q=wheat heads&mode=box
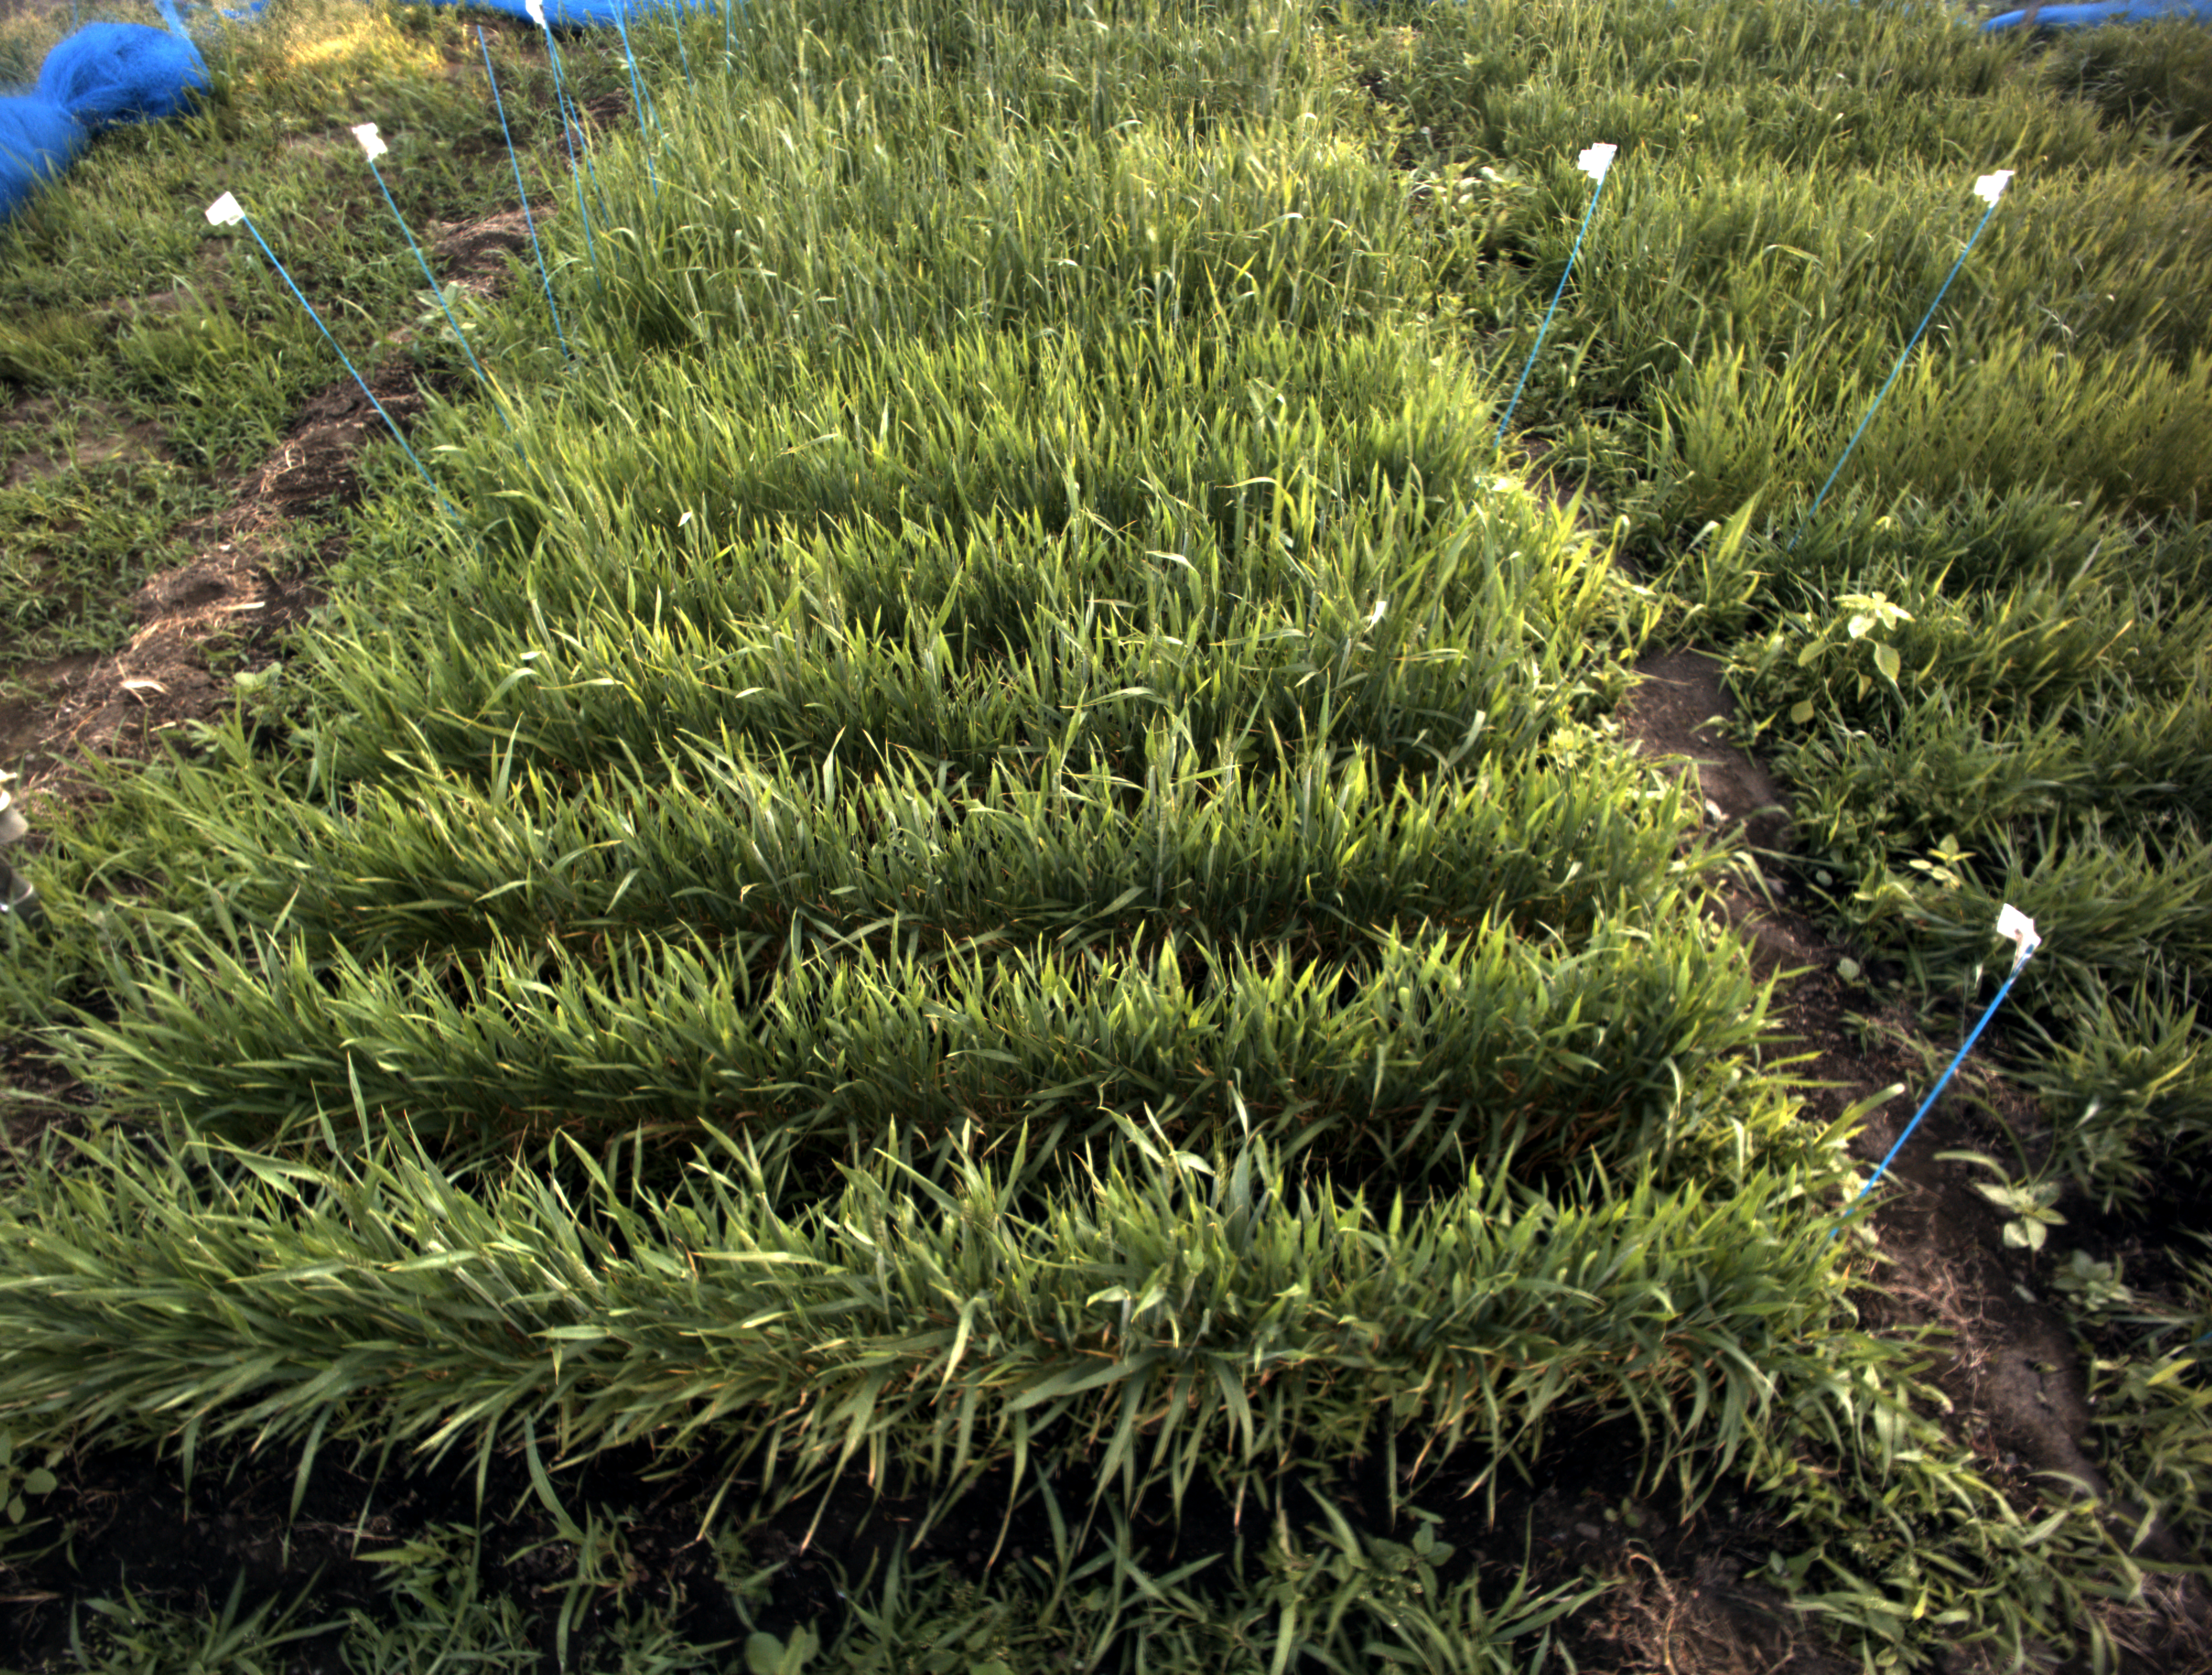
[1483,494,1490,508]
[1407,608,1423,642]
[1385,422,1390,440]
[1131,385,1137,409]
[818,585,831,620]
[772,102,780,123]
[1649,175,1658,196]
[1313,52,1322,84]
[1394,498,1408,541]
[591,509,601,537]
[745,836,757,858]
[756,798,771,836]
[798,625,805,667]
[1249,389,1262,417]
[1357,579,1371,611]
[1157,742,1167,770]
[186,1239,219,1267]
[766,104,774,124]
[1102,167,1112,190]
[801,804,812,829]
[697,139,708,167]
[1378,609,1396,651]
[1051,771,1063,825]
[594,487,610,532]
[1023,222,1033,247]
[333,1247,373,1273]
[1186,513,1195,554]
[739,753,758,797]
[869,1199,887,1248]
[922,433,932,472]
[736,173,746,214]
[1836,84,1846,112]
[872,109,878,136]
[764,124,774,167]
[1066,428,1073,462]
[766,230,778,264]
[1310,750,1322,790]
[614,136,637,189]
[767,658,783,687]
[977,232,986,256]
[1149,262,1158,284]
[771,123,781,153]
[675,104,687,131]
[630,645,641,677]
[1303,145,1309,168]
[1220,729,1233,781]
[637,197,652,238]
[1485,211,1496,233]
[1187,124,1194,147]
[1347,286,1355,308]
[1344,506,1354,548]
[1157,788,1168,833]
[691,130,699,152]
[1501,619,1518,654]
[828,266,838,297]
[822,140,830,161]
[975,1202,985,1221]
[751,250,762,273]
[1093,138,1107,169]
[1230,549,1240,585]
[416,748,453,801]
[1175,783,1185,813]
[1208,197,1216,223]
[1148,605,1156,640]
[596,151,607,189]
[1166,1229,1177,1264]
[1083,643,1094,675]
[802,97,813,134]
[1072,657,1083,695]
[1477,611,1495,657]
[1214,1150,1228,1203]
[837,97,849,137]
[1546,576,1554,605]
[702,191,715,201]
[1166,122,1173,162]
[978,273,984,292]
[858,93,866,129]
[1314,552,1326,609]
[688,505,700,537]
[571,519,586,552]
[1186,768,1197,800]
[835,592,847,631]
[739,1227,774,1274]
[960,1198,974,1226]
[758,116,765,152]
[570,1251,601,1290]
[670,106,681,137]
[1163,1156,1175,1189]
[315,1170,352,1208]
[797,39,805,71]
[1100,1221,1112,1256]
[677,140,691,179]
[1064,594,1070,620]
[1088,69,1097,104]
[914,619,926,664]
[840,650,849,674]
[824,168,833,191]
[1297,116,1306,147]
[703,162,712,192]
[805,214,818,256]
[1275,99,1284,132]
[1149,519,1157,562]
[1115,228,1123,249]
[286,796,312,833]
[584,121,593,148]
[911,160,918,182]
[1151,241,1157,254]
[1195,599,1205,641]
[983,1203,995,1232]
[1073,510,1082,558]
[751,122,759,152]
[1266,106,1279,142]
[572,536,590,569]
[474,800,503,840]
[715,128,728,161]
[1299,750,1311,786]
[1030,165,1043,208]
[1233,186,1239,202]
